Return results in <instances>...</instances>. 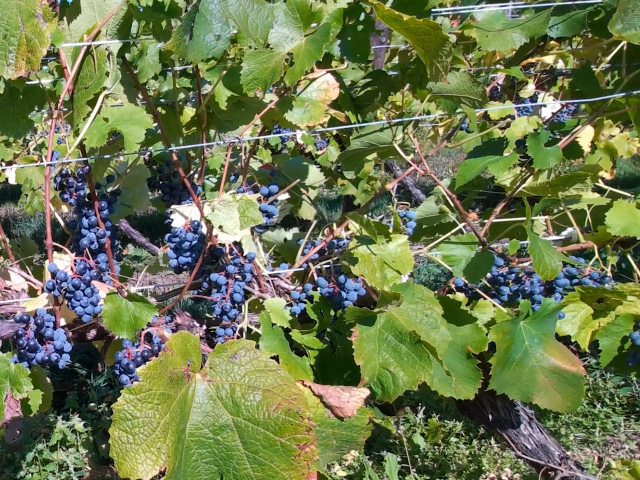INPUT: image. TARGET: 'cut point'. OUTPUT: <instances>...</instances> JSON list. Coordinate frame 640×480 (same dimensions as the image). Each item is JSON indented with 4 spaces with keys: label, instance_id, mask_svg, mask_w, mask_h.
I'll use <instances>...</instances> for the list:
<instances>
[{
    "label": "cut point",
    "instance_id": "obj_1",
    "mask_svg": "<svg viewBox=\"0 0 640 480\" xmlns=\"http://www.w3.org/2000/svg\"><path fill=\"white\" fill-rule=\"evenodd\" d=\"M54 246H58L60 247L62 250L66 251L69 255H72V251L66 247L63 246V244L57 243V242H53Z\"/></svg>",
    "mask_w": 640,
    "mask_h": 480
},
{
    "label": "cut point",
    "instance_id": "obj_2",
    "mask_svg": "<svg viewBox=\"0 0 640 480\" xmlns=\"http://www.w3.org/2000/svg\"><path fill=\"white\" fill-rule=\"evenodd\" d=\"M153 331V327H151L150 329L144 330L140 333V342H143V340H145V334L152 332Z\"/></svg>",
    "mask_w": 640,
    "mask_h": 480
},
{
    "label": "cut point",
    "instance_id": "obj_3",
    "mask_svg": "<svg viewBox=\"0 0 640 480\" xmlns=\"http://www.w3.org/2000/svg\"><path fill=\"white\" fill-rule=\"evenodd\" d=\"M194 205H195V201L192 200L189 215H188V221H191Z\"/></svg>",
    "mask_w": 640,
    "mask_h": 480
}]
</instances>
